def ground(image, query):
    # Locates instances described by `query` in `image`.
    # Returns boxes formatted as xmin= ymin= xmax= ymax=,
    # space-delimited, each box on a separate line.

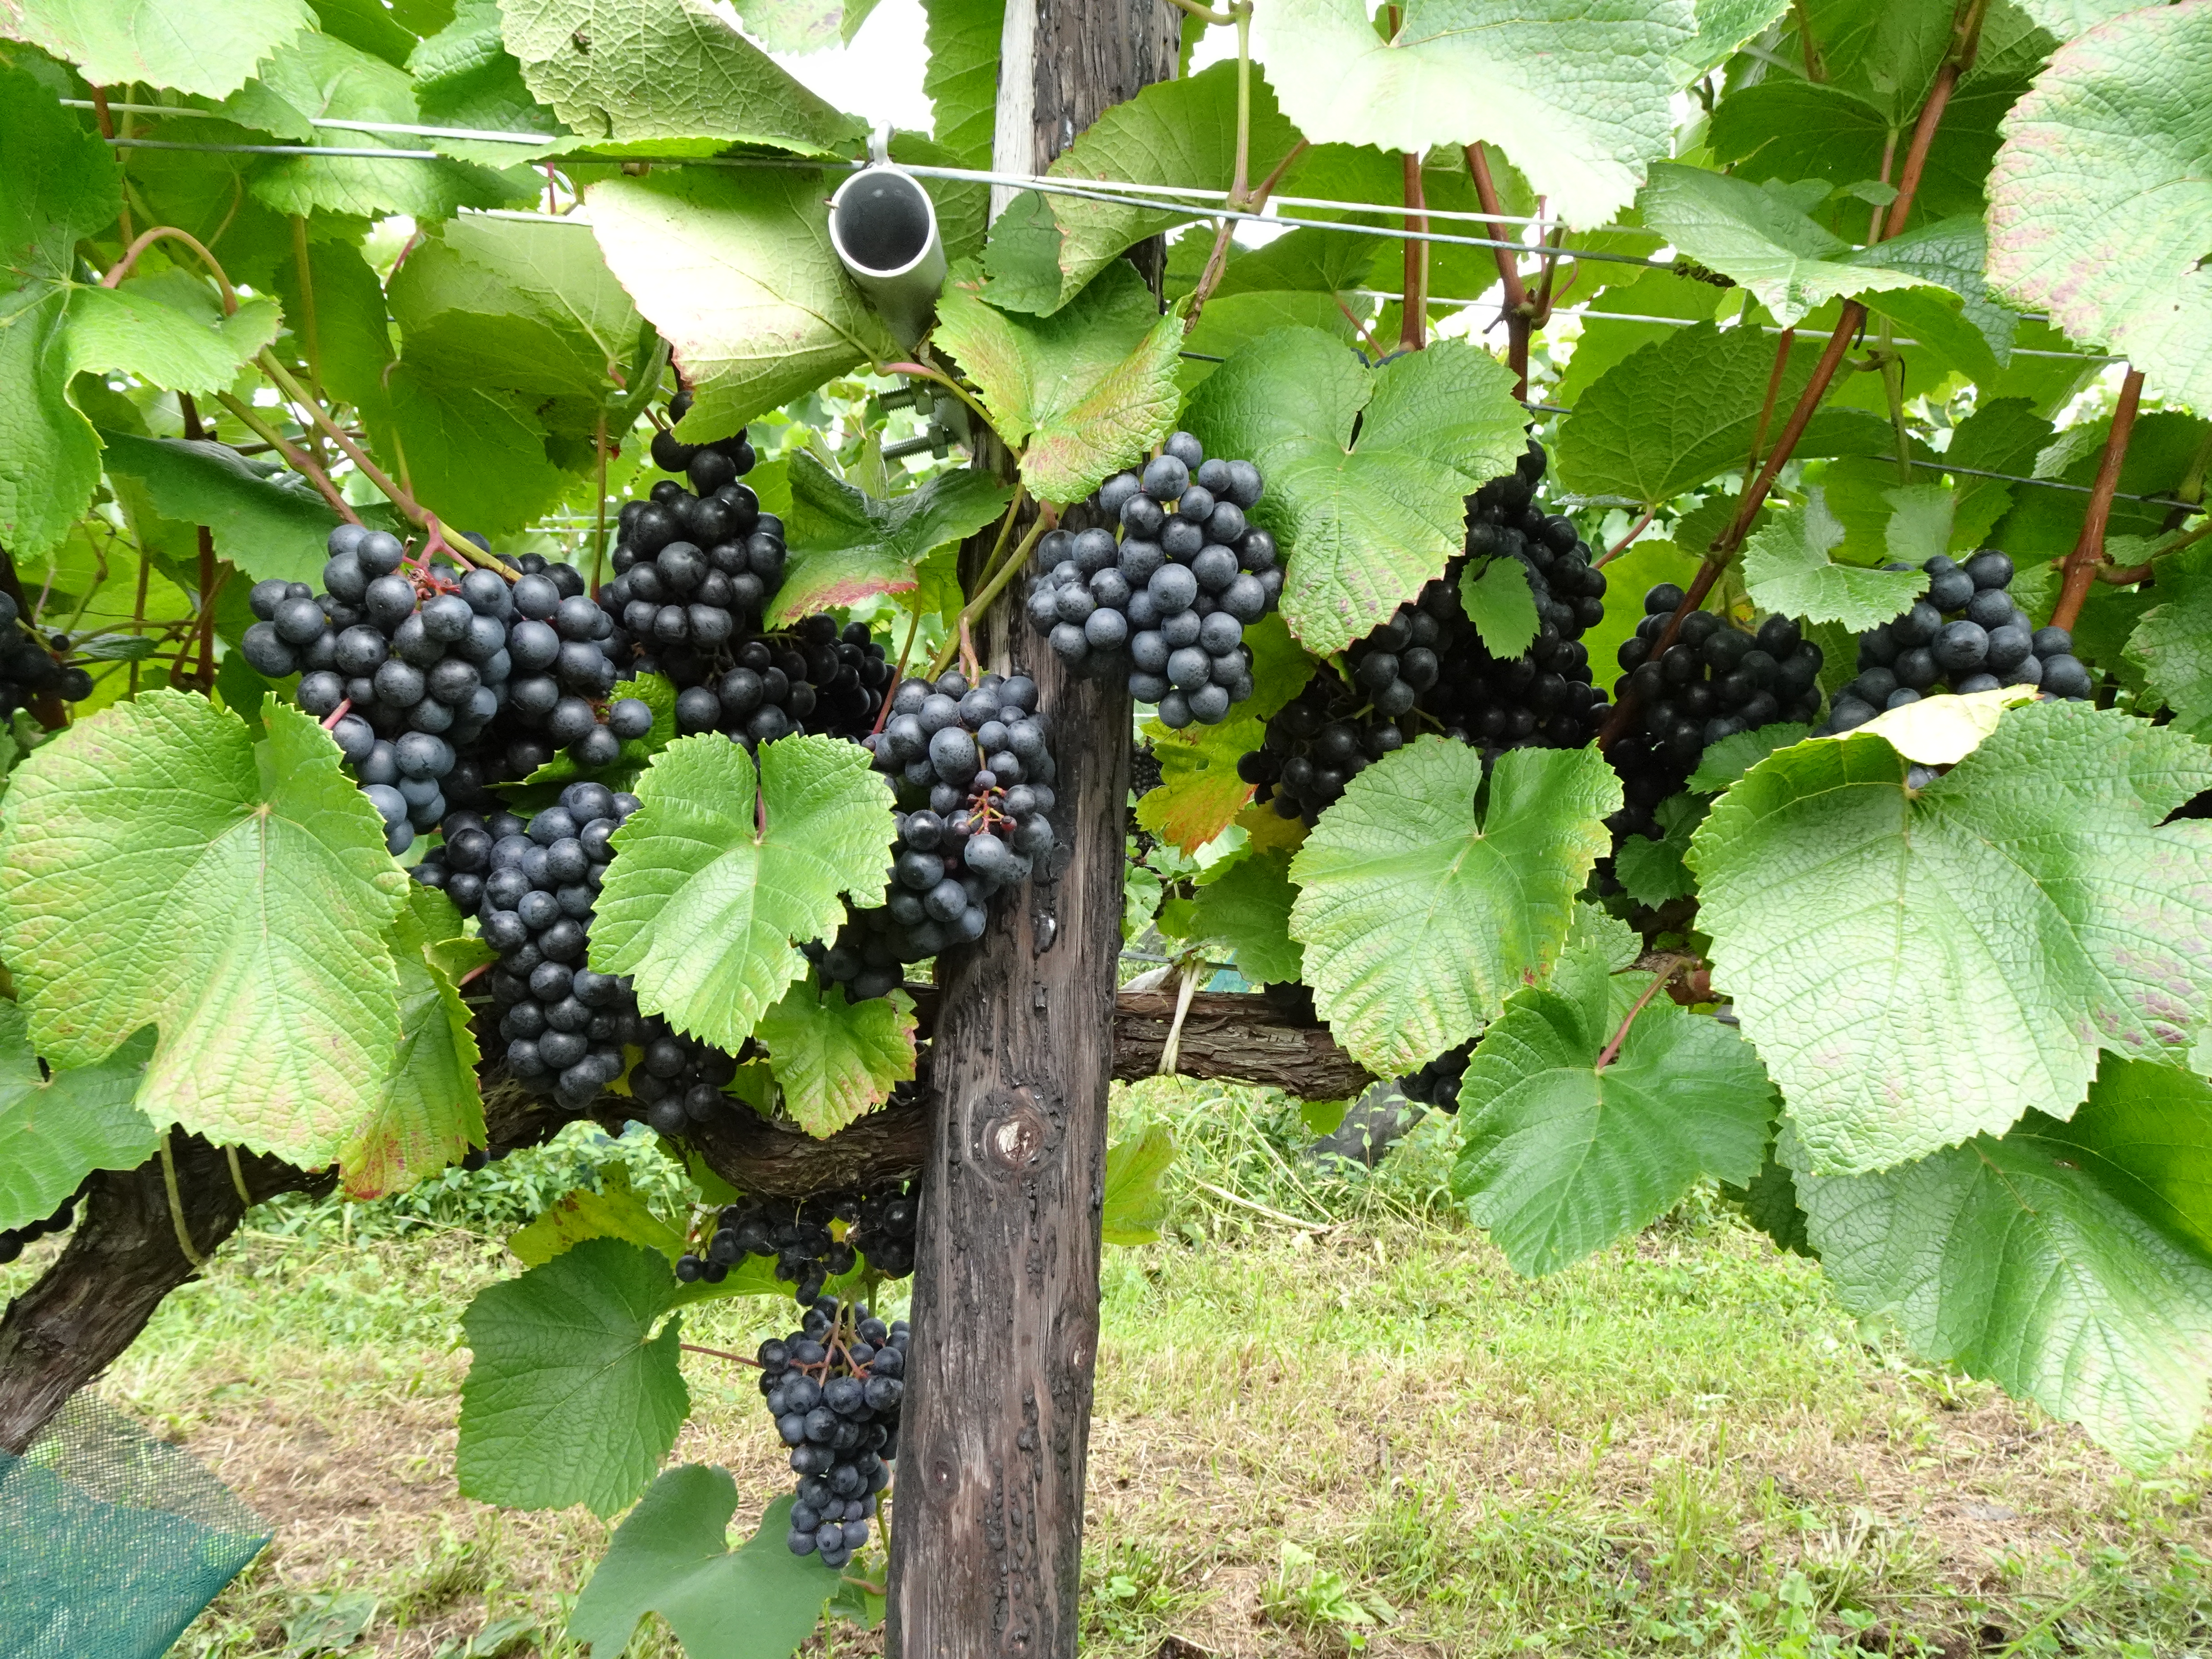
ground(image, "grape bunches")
xmin=499 ymin=573 xmax=653 ymax=774
xmin=786 ymin=615 xmax=898 ymax=744
xmin=758 ymin=1296 xmax=911 ymax=1568
xmin=1429 ymin=404 xmax=1608 ymax=781
xmin=651 ymin=391 xmax=756 ymax=493
xmin=860 ymin=664 xmax=1057 ymax=963
xmin=1337 ymin=584 xmax=1440 ymax=716
xmin=626 ymin=1013 xmax=756 ymax=1134
xmin=439 ymin=705 xmax=554 ymax=827
xmin=1399 ymin=1032 xmax=1485 ymax=1116
xmin=459 ymin=553 xmax=584 ymax=601
xmin=420 ymin=810 xmax=529 ymax=920
xmin=660 ymin=644 xmax=816 ymax=785
xmin=0 ymin=1208 xmax=72 ymax=1263
xmin=599 ymin=481 xmax=791 ymax=661
xmin=766 ymin=1203 xmax=833 ymax=1307
xmin=241 ymin=523 xmax=512 ymax=857
xmin=1025 ymin=431 xmax=1286 ymax=729
xmin=799 ymin=907 xmax=904 ymax=1005
xmin=0 ymin=590 xmax=94 ymax=720
xmin=815 ymin=1171 xmax=923 ymax=1280
xmin=1237 ymin=658 xmax=1401 ymax=832
xmin=1589 ymin=584 xmax=1719 ymax=842
xmin=1705 ymin=612 xmax=1822 ymax=745
xmin=1827 ymin=549 xmax=2100 ymax=789
xmin=475 ymin=781 xmax=646 ymax=1110
xmin=676 ymin=1195 xmax=781 ymax=1284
